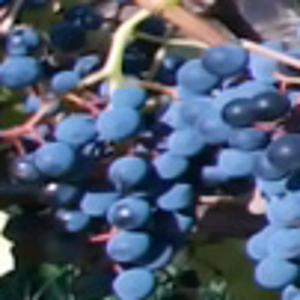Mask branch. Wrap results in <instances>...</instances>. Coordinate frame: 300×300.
<instances>
[{
  "instance_id": "obj_1",
  "label": "branch",
  "mask_w": 300,
  "mask_h": 300,
  "mask_svg": "<svg viewBox=\"0 0 300 300\" xmlns=\"http://www.w3.org/2000/svg\"><path fill=\"white\" fill-rule=\"evenodd\" d=\"M136 7L141 8L160 19L168 21L176 27L193 34L199 40L214 48H235L251 51L277 63L300 69V59L274 51L253 41L241 38L235 31H222L215 28L209 20L200 17L193 11L168 0H133Z\"/></svg>"
}]
</instances>
